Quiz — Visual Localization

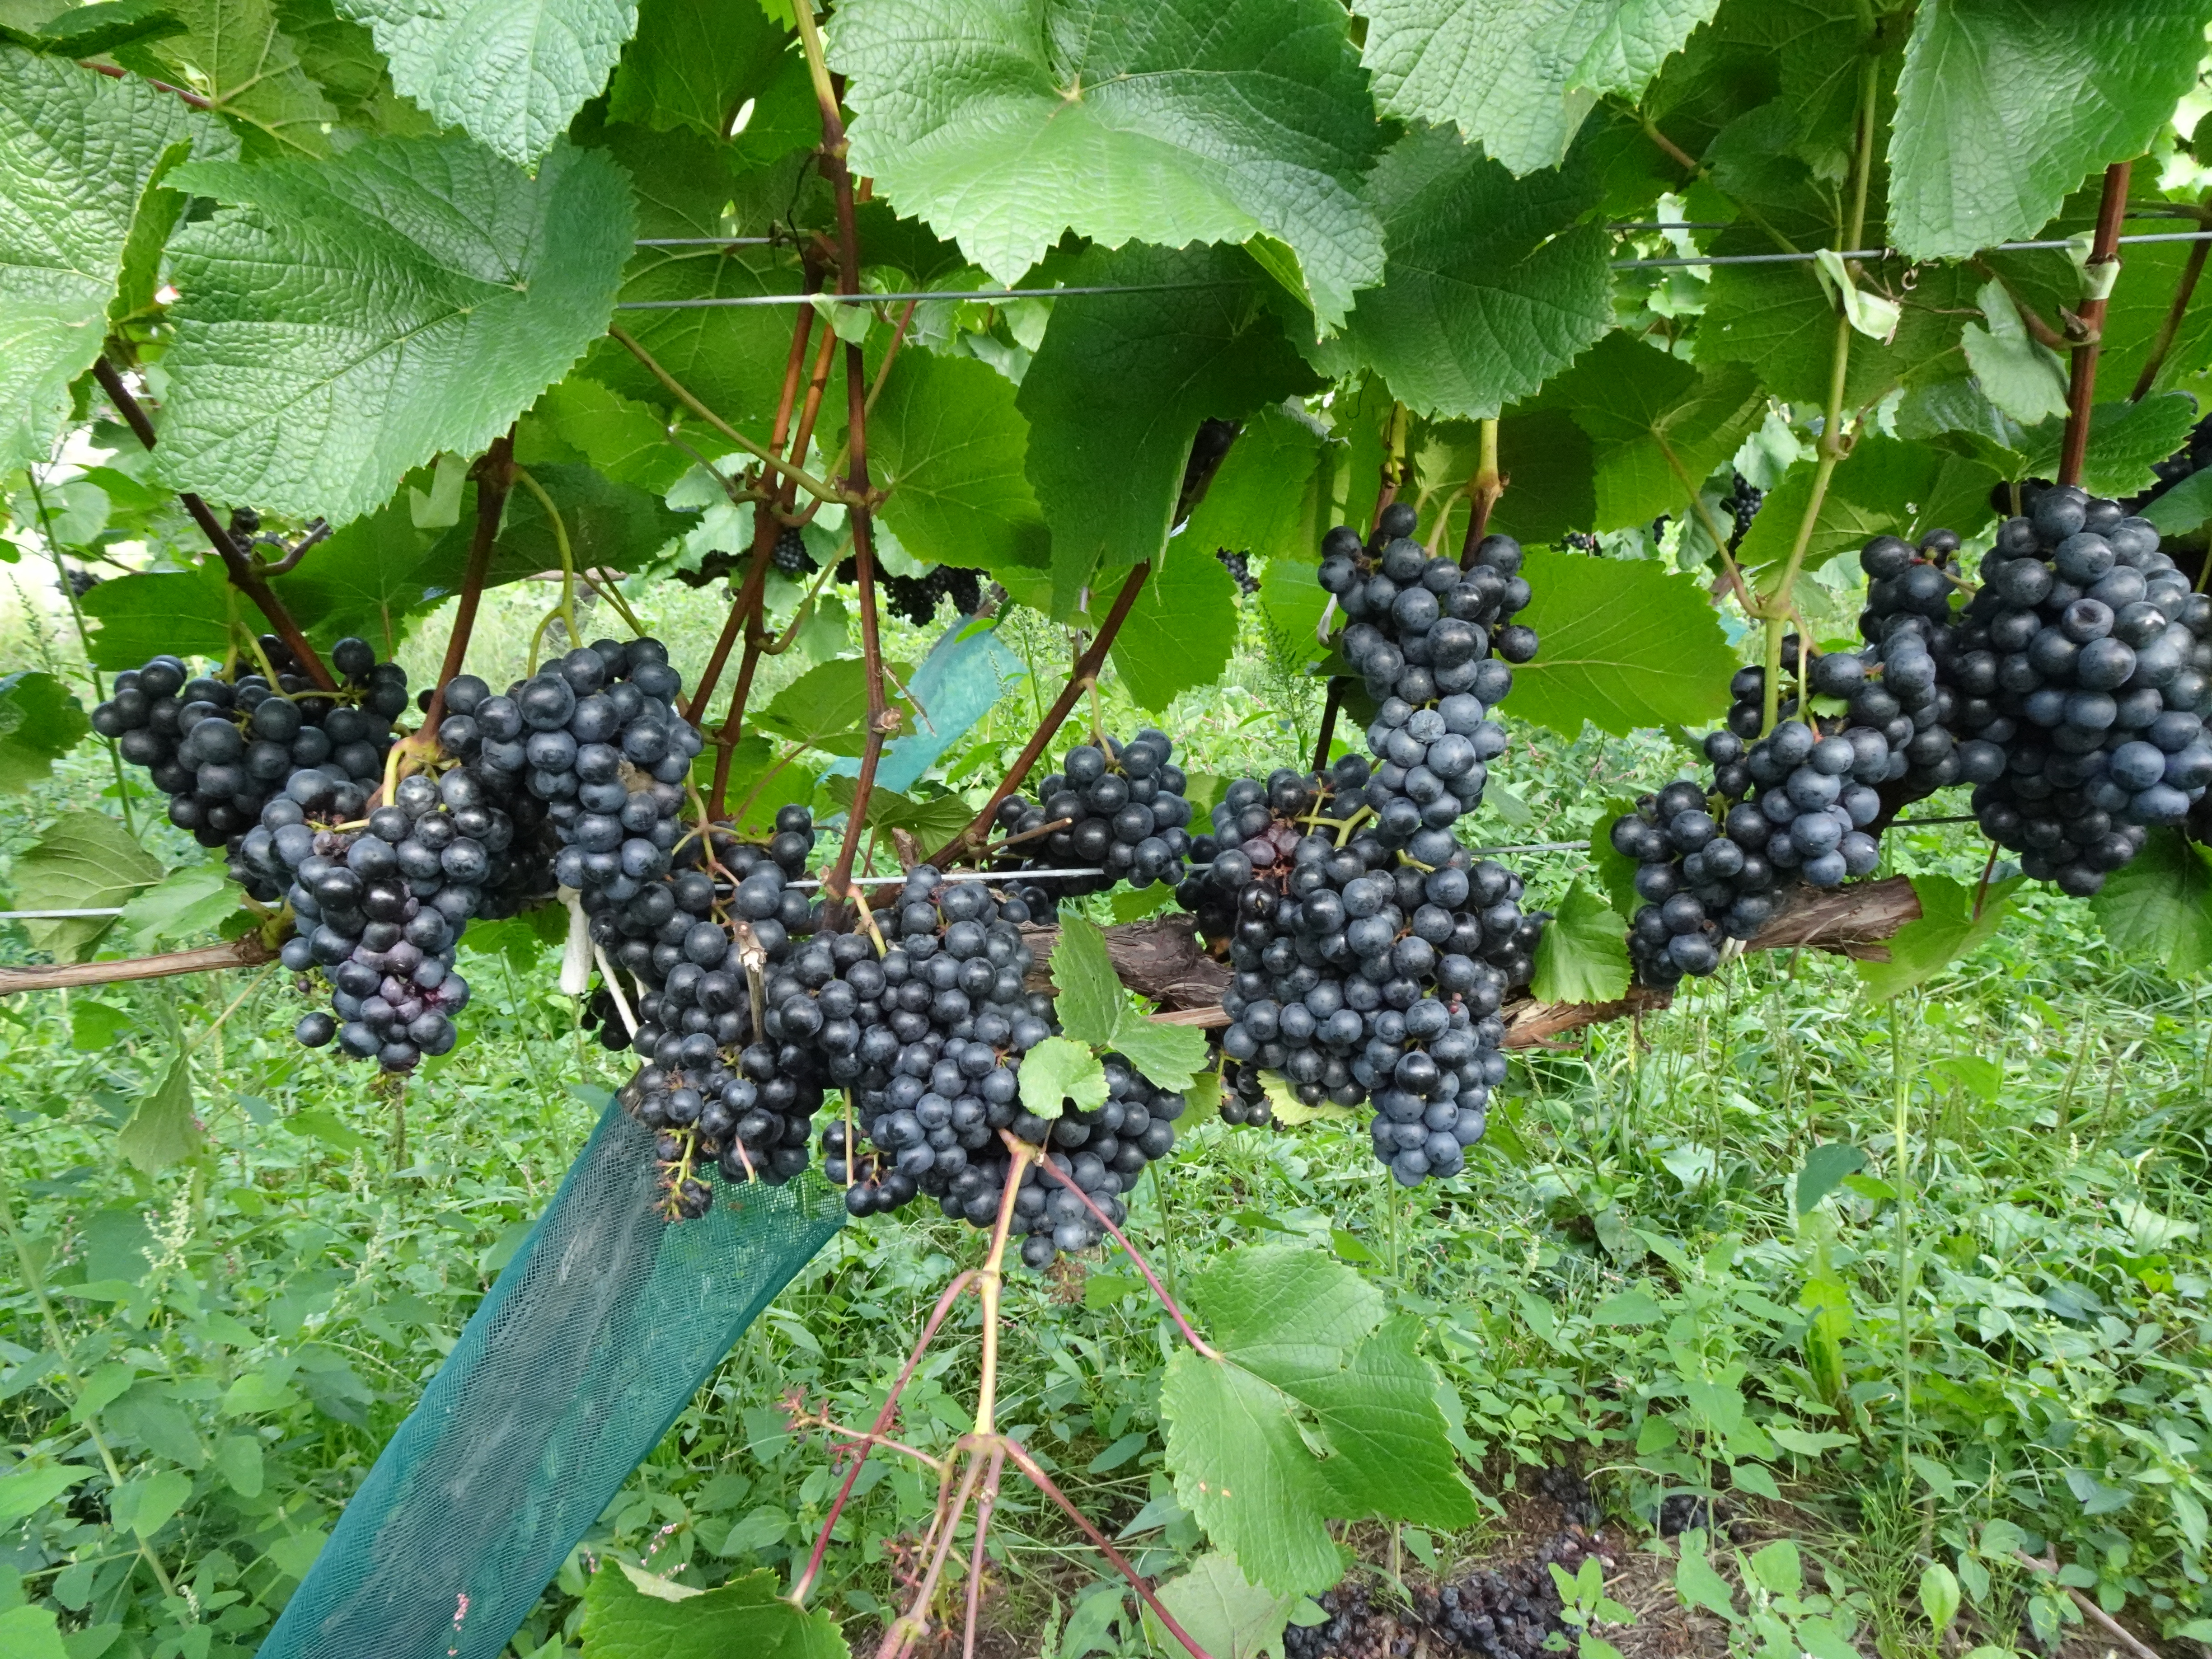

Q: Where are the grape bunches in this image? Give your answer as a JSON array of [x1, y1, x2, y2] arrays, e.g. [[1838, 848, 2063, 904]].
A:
[[1211, 755, 1368, 1106], [918, 1155, 1011, 1224], [581, 964, 645, 1051], [178, 636, 410, 819], [580, 803, 828, 1219], [437, 638, 704, 901], [763, 895, 908, 1088], [479, 780, 567, 919], [998, 727, 1191, 888], [981, 1020, 1184, 1269], [1318, 502, 1539, 851], [1220, 1060, 1271, 1125], [92, 655, 260, 847], [1175, 836, 1240, 946], [895, 864, 1031, 1023], [1003, 854, 1117, 916], [410, 689, 450, 734], [1906, 625, 2014, 788], [1702, 633, 1822, 795], [1858, 526, 1963, 646], [1970, 764, 2148, 897], [1971, 478, 2212, 827], [821, 1109, 918, 1217], [859, 993, 1056, 1178], [1290, 835, 1540, 1187], [238, 769, 514, 1071], [716, 1046, 828, 1185], [1611, 781, 1775, 989], [1748, 632, 1938, 890]]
